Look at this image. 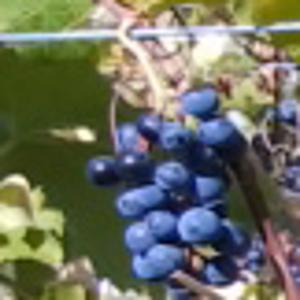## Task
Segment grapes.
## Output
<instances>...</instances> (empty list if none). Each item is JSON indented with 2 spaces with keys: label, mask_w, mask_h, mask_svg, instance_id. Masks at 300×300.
<instances>
[{
  "label": "grapes",
  "mask_w": 300,
  "mask_h": 300,
  "mask_svg": "<svg viewBox=\"0 0 300 300\" xmlns=\"http://www.w3.org/2000/svg\"><path fill=\"white\" fill-rule=\"evenodd\" d=\"M214 84L200 82L181 95L167 96L159 111L146 109L134 123L119 126L114 151L90 159L87 177L104 190L120 188L114 212L134 221L124 250L142 281H158L183 291L195 281L227 288L236 281L235 256L251 240L226 213L230 177L218 156L241 153L237 127L214 114Z\"/></svg>",
  "instance_id": "01657485"
}]
</instances>
